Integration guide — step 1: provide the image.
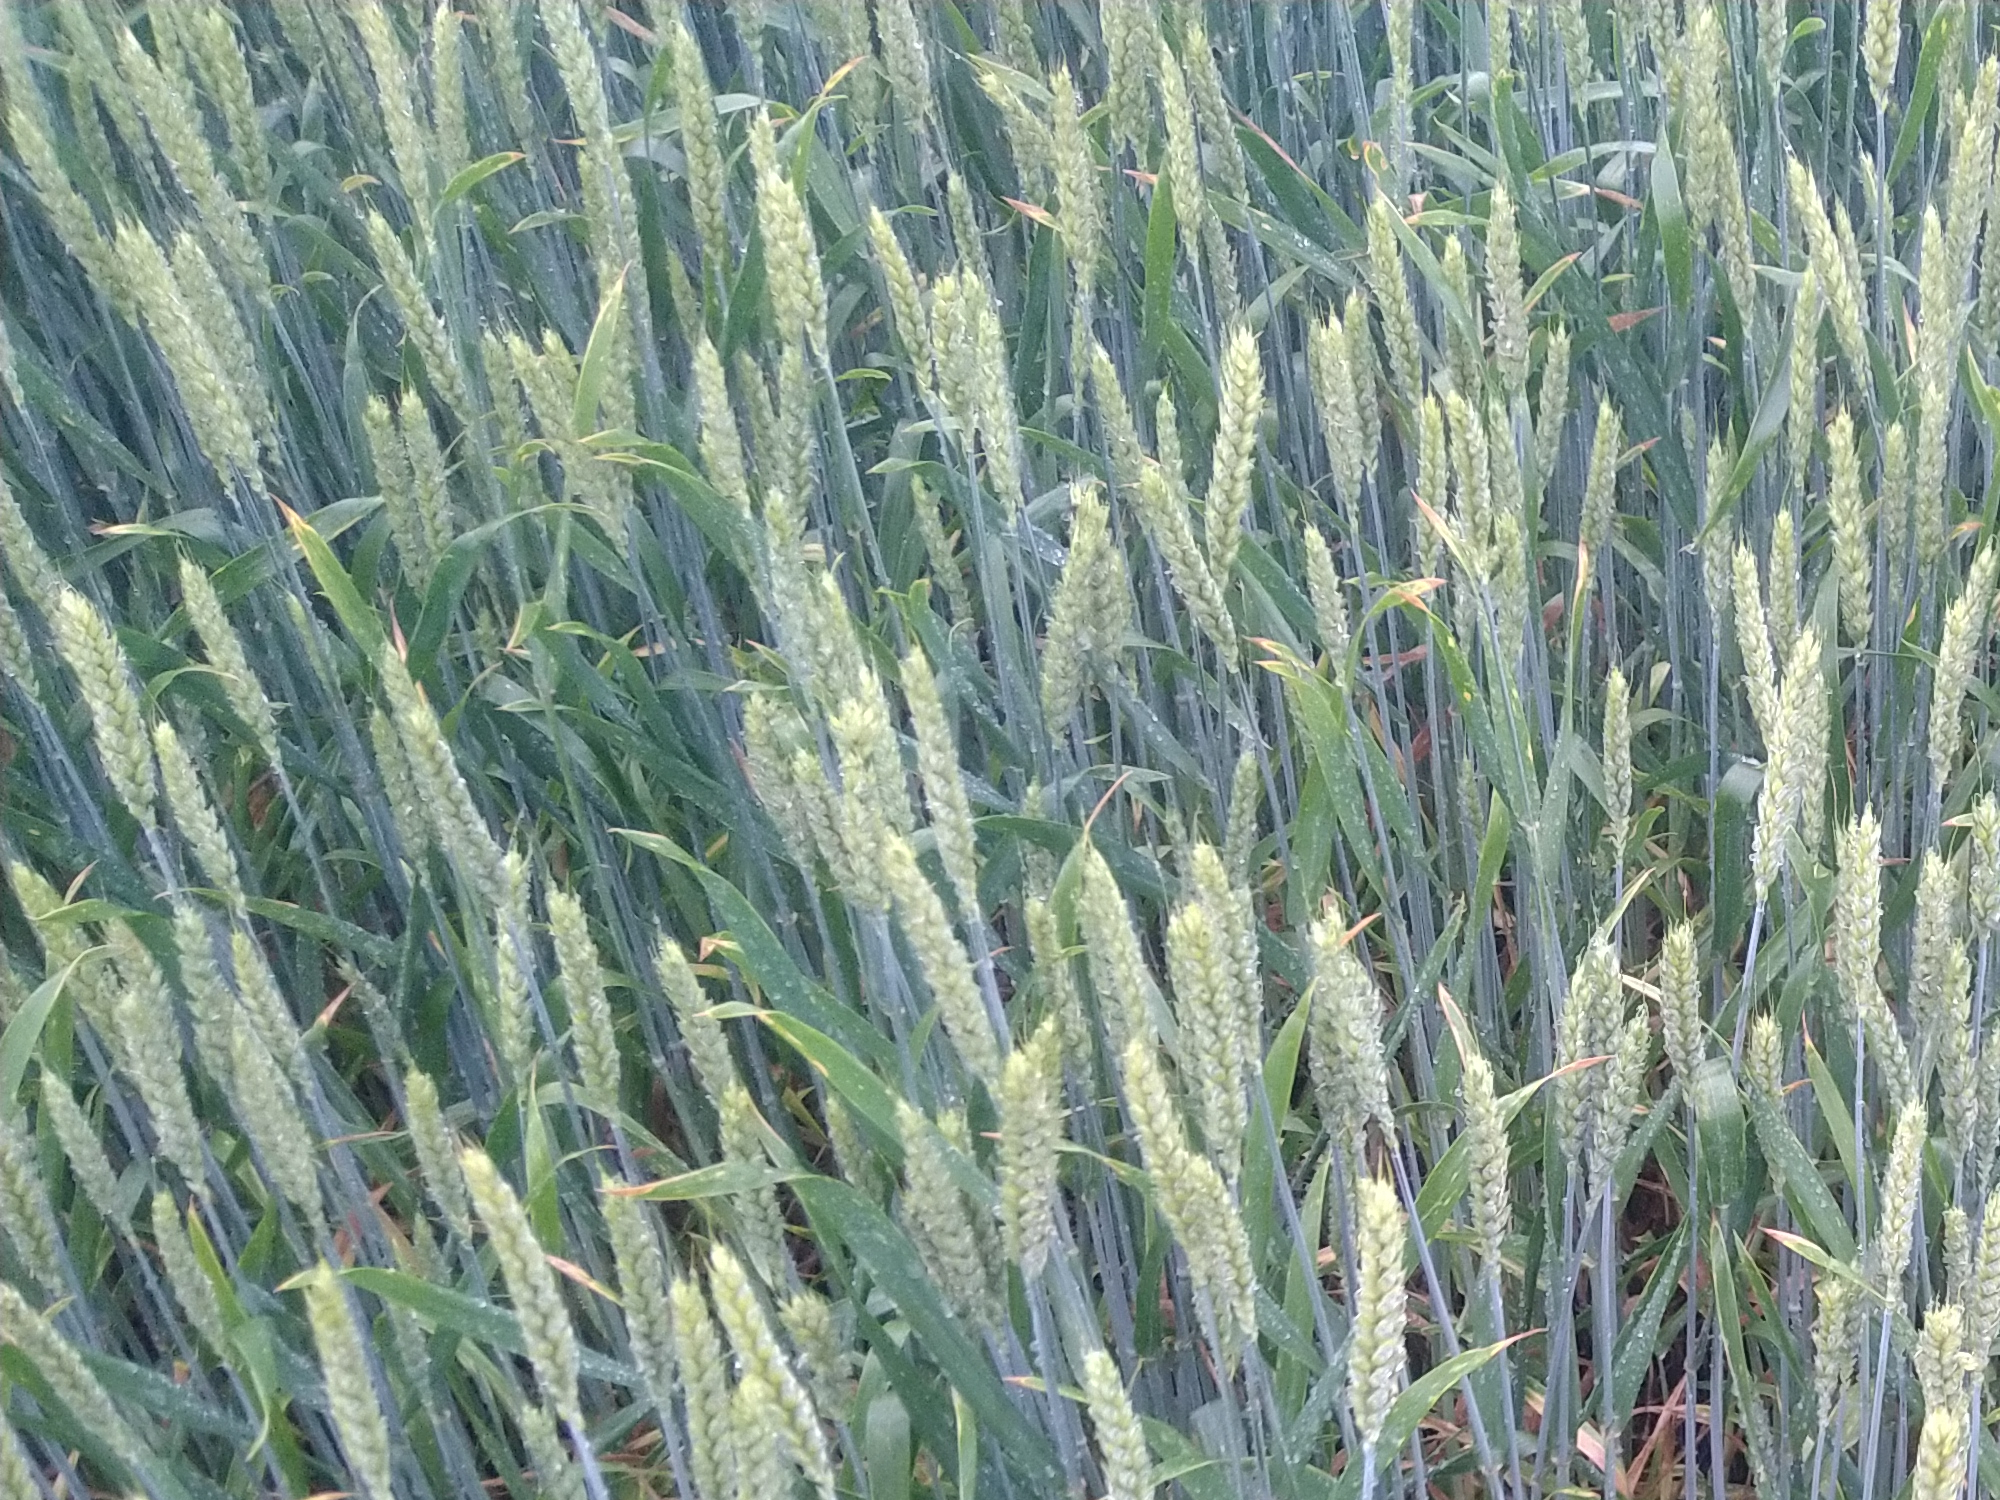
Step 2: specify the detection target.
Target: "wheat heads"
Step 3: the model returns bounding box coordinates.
[0,1419,57,1500]
[536,0,609,130]
[1136,467,1238,657]
[313,0,385,145]
[1579,401,1618,553]
[40,1073,130,1220]
[1784,155,1861,338]
[1119,1036,1197,1235]
[0,484,58,619]
[1548,0,1561,84]
[727,0,765,65]
[901,639,982,917]
[1883,422,1908,558]
[1158,38,1207,245]
[853,667,918,829]
[1692,11,1717,84]
[1603,671,1638,840]
[818,575,873,693]
[758,163,806,351]
[1569,939,1624,1041]
[929,277,970,420]
[707,1240,831,1475]
[1022,901,1085,1073]
[895,1101,994,1318]
[12,861,122,1022]
[1646,0,1679,76]
[175,557,282,745]
[1805,678,1828,831]
[1556,0,1592,87]
[658,0,682,32]
[116,225,234,467]
[1109,0,1150,139]
[233,932,314,1082]
[1614,0,1644,63]
[52,599,154,815]
[1861,988,1928,1124]
[977,76,1048,213]
[115,50,220,197]
[195,335,264,468]
[486,1,535,165]
[171,0,224,106]
[1087,1347,1155,1500]
[1485,0,1513,72]
[1967,1019,2000,1198]
[0,1294,130,1455]
[1934,939,1972,1142]
[1751,1007,1789,1117]
[150,1197,225,1347]
[214,9,272,200]
[1072,860,1149,1060]
[945,183,991,285]
[1346,1179,1405,1444]
[1303,525,1350,678]
[1931,542,1999,773]
[1533,333,1570,492]
[998,0,1041,101]
[1919,205,1952,397]
[481,335,547,511]
[751,106,772,168]
[937,1108,971,1164]
[1917,391,1949,553]
[168,231,281,439]
[1943,117,1990,305]
[540,329,601,437]
[744,1379,795,1500]
[1494,509,1524,673]
[1597,1005,1648,1182]
[1364,216,1425,399]
[115,996,203,1184]
[725,1095,807,1300]
[1881,1103,1921,1289]
[1317,945,1405,1129]
[967,270,987,384]
[1343,298,1382,461]
[1185,27,1248,196]
[1198,328,1262,588]
[308,1270,393,1500]
[1733,545,1779,680]
[1913,849,1947,1041]
[386,653,508,904]
[1096,529,1111,670]
[199,196,268,268]
[735,353,781,495]
[1792,266,1824,391]
[1682,0,1707,35]
[735,1381,779,1500]
[1768,508,1799,671]
[596,1182,680,1403]
[102,920,181,1042]
[1465,1063,1514,1242]
[1701,436,1729,611]
[172,905,240,1092]
[1044,575,1096,729]
[872,210,934,392]
[1715,131,1755,310]
[1096,343,1140,466]
[1970,792,2000,936]
[1036,121,1058,169]
[549,888,617,1101]
[146,0,201,126]
[499,858,529,1067]
[1948,86,1974,162]
[742,696,809,868]
[1157,392,1194,505]
[602,322,632,499]
[153,724,240,890]
[0,1126,74,1279]
[772,698,816,764]
[879,0,925,121]
[879,852,999,1088]
[1412,397,1444,560]
[1832,198,1869,321]
[1304,316,1325,414]
[288,591,343,695]
[1199,195,1243,334]
[371,703,426,867]
[850,0,879,117]
[1196,842,1249,1060]
[1944,1205,1962,1326]
[579,152,619,292]
[1660,918,1706,1075]
[1717,36,1737,139]
[780,344,817,515]
[1665,62,1683,122]
[1481,183,1528,382]
[431,6,467,181]
[764,500,839,700]
[1067,279,1092,383]
[1742,678,1778,746]
[351,0,431,196]
[672,26,729,264]
[1222,755,1262,898]
[1745,637,1817,876]
[1554,999,1589,1147]
[1321,325,1370,521]
[796,200,827,353]
[913,482,967,618]
[1962,1190,2000,1369]
[1233,883,1258,1020]
[654,935,747,1111]
[1819,1284,1853,1404]
[838,764,881,908]
[1827,412,1871,648]
[70,56,114,170]
[1688,57,1720,223]
[67,0,155,152]
[614,155,652,322]
[693,341,747,507]
[1110,559,1136,669]
[976,303,1020,490]
[1193,1254,1236,1351]
[0,595,37,693]
[825,692,878,821]
[1759,0,1785,84]
[386,1278,432,1391]
[1050,73,1098,284]
[1175,905,1243,1170]
[6,109,135,300]
[1876,1424,1965,1500]
[1186,1158,1254,1314]
[1510,0,1539,74]
[507,338,600,505]
[1303,970,1365,1126]
[669,259,698,335]
[461,1145,585,1413]
[1791,345,1820,459]
[1979,133,2000,335]
[1838,801,1882,1030]
[227,1005,314,1200]
[1390,0,1415,170]
[584,0,613,39]
[1066,492,1106,580]
[364,403,426,595]
[670,1270,733,1500]
[798,762,891,918]
[521,1409,601,1500]
[1027,1016,1059,1192]
[999,1051,1043,1256]
[397,393,451,553]
[1489,400,1528,545]
[1978,55,2000,127]
[1439,237,1479,395]
[1915,1309,1962,1437]
[370,209,471,426]
[1864,0,1900,84]
[402,1067,479,1217]
[1448,391,1491,558]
